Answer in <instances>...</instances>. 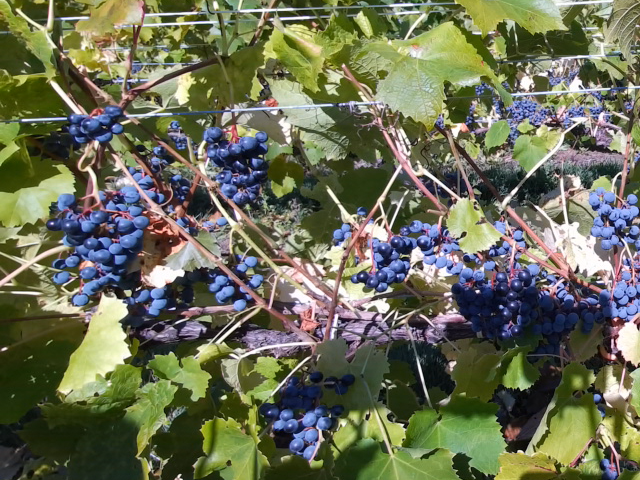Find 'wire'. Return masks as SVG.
<instances>
[{"instance_id": "wire-5", "label": "wire", "mask_w": 640, "mask_h": 480, "mask_svg": "<svg viewBox=\"0 0 640 480\" xmlns=\"http://www.w3.org/2000/svg\"><path fill=\"white\" fill-rule=\"evenodd\" d=\"M57 20L60 21H79V20H88V17L85 15H77V16H60V17H33V22H53L56 23Z\"/></svg>"}, {"instance_id": "wire-1", "label": "wire", "mask_w": 640, "mask_h": 480, "mask_svg": "<svg viewBox=\"0 0 640 480\" xmlns=\"http://www.w3.org/2000/svg\"><path fill=\"white\" fill-rule=\"evenodd\" d=\"M424 6L454 7L455 3L447 2V1H421V2H411V3L395 2V3H390L389 5H325V6L306 7V8L267 7V8H252V9L216 10V11H209V12H188V11H170V12H154V13L145 12L144 16L146 18L173 17V16L211 17V16H218V15L254 14V13H269V12L308 13V12L328 11V10H380L379 14L381 16L412 15L415 17H419L420 13L415 10H400V11H383V10H399L403 8L424 7Z\"/></svg>"}, {"instance_id": "wire-6", "label": "wire", "mask_w": 640, "mask_h": 480, "mask_svg": "<svg viewBox=\"0 0 640 480\" xmlns=\"http://www.w3.org/2000/svg\"><path fill=\"white\" fill-rule=\"evenodd\" d=\"M595 5V6H606L607 2L606 1H597V0H581V1H575L573 3H565L562 4L561 2L557 3V7L559 9H571V8H575L577 6H583V5Z\"/></svg>"}, {"instance_id": "wire-2", "label": "wire", "mask_w": 640, "mask_h": 480, "mask_svg": "<svg viewBox=\"0 0 640 480\" xmlns=\"http://www.w3.org/2000/svg\"><path fill=\"white\" fill-rule=\"evenodd\" d=\"M382 104L381 100L378 101H355L349 103H332L325 102L316 105H276L269 104L263 108H237V107H228V108H212V109H198V110H171V111H163V112H153V113H127L123 114V119L129 118H156V117H165V116H173V115H200V114H214V113H265L268 110H318L322 108H351L357 106H380Z\"/></svg>"}, {"instance_id": "wire-3", "label": "wire", "mask_w": 640, "mask_h": 480, "mask_svg": "<svg viewBox=\"0 0 640 480\" xmlns=\"http://www.w3.org/2000/svg\"><path fill=\"white\" fill-rule=\"evenodd\" d=\"M626 90H640V85L603 86L601 88H592V89H546L541 91H529L525 93L513 92L512 96L516 98H527L531 96H543L548 94H594V93H603L605 91H626Z\"/></svg>"}, {"instance_id": "wire-4", "label": "wire", "mask_w": 640, "mask_h": 480, "mask_svg": "<svg viewBox=\"0 0 640 480\" xmlns=\"http://www.w3.org/2000/svg\"><path fill=\"white\" fill-rule=\"evenodd\" d=\"M49 121L67 122V117L47 116L40 118H16V119H0V124H19V123H42Z\"/></svg>"}]
</instances>
